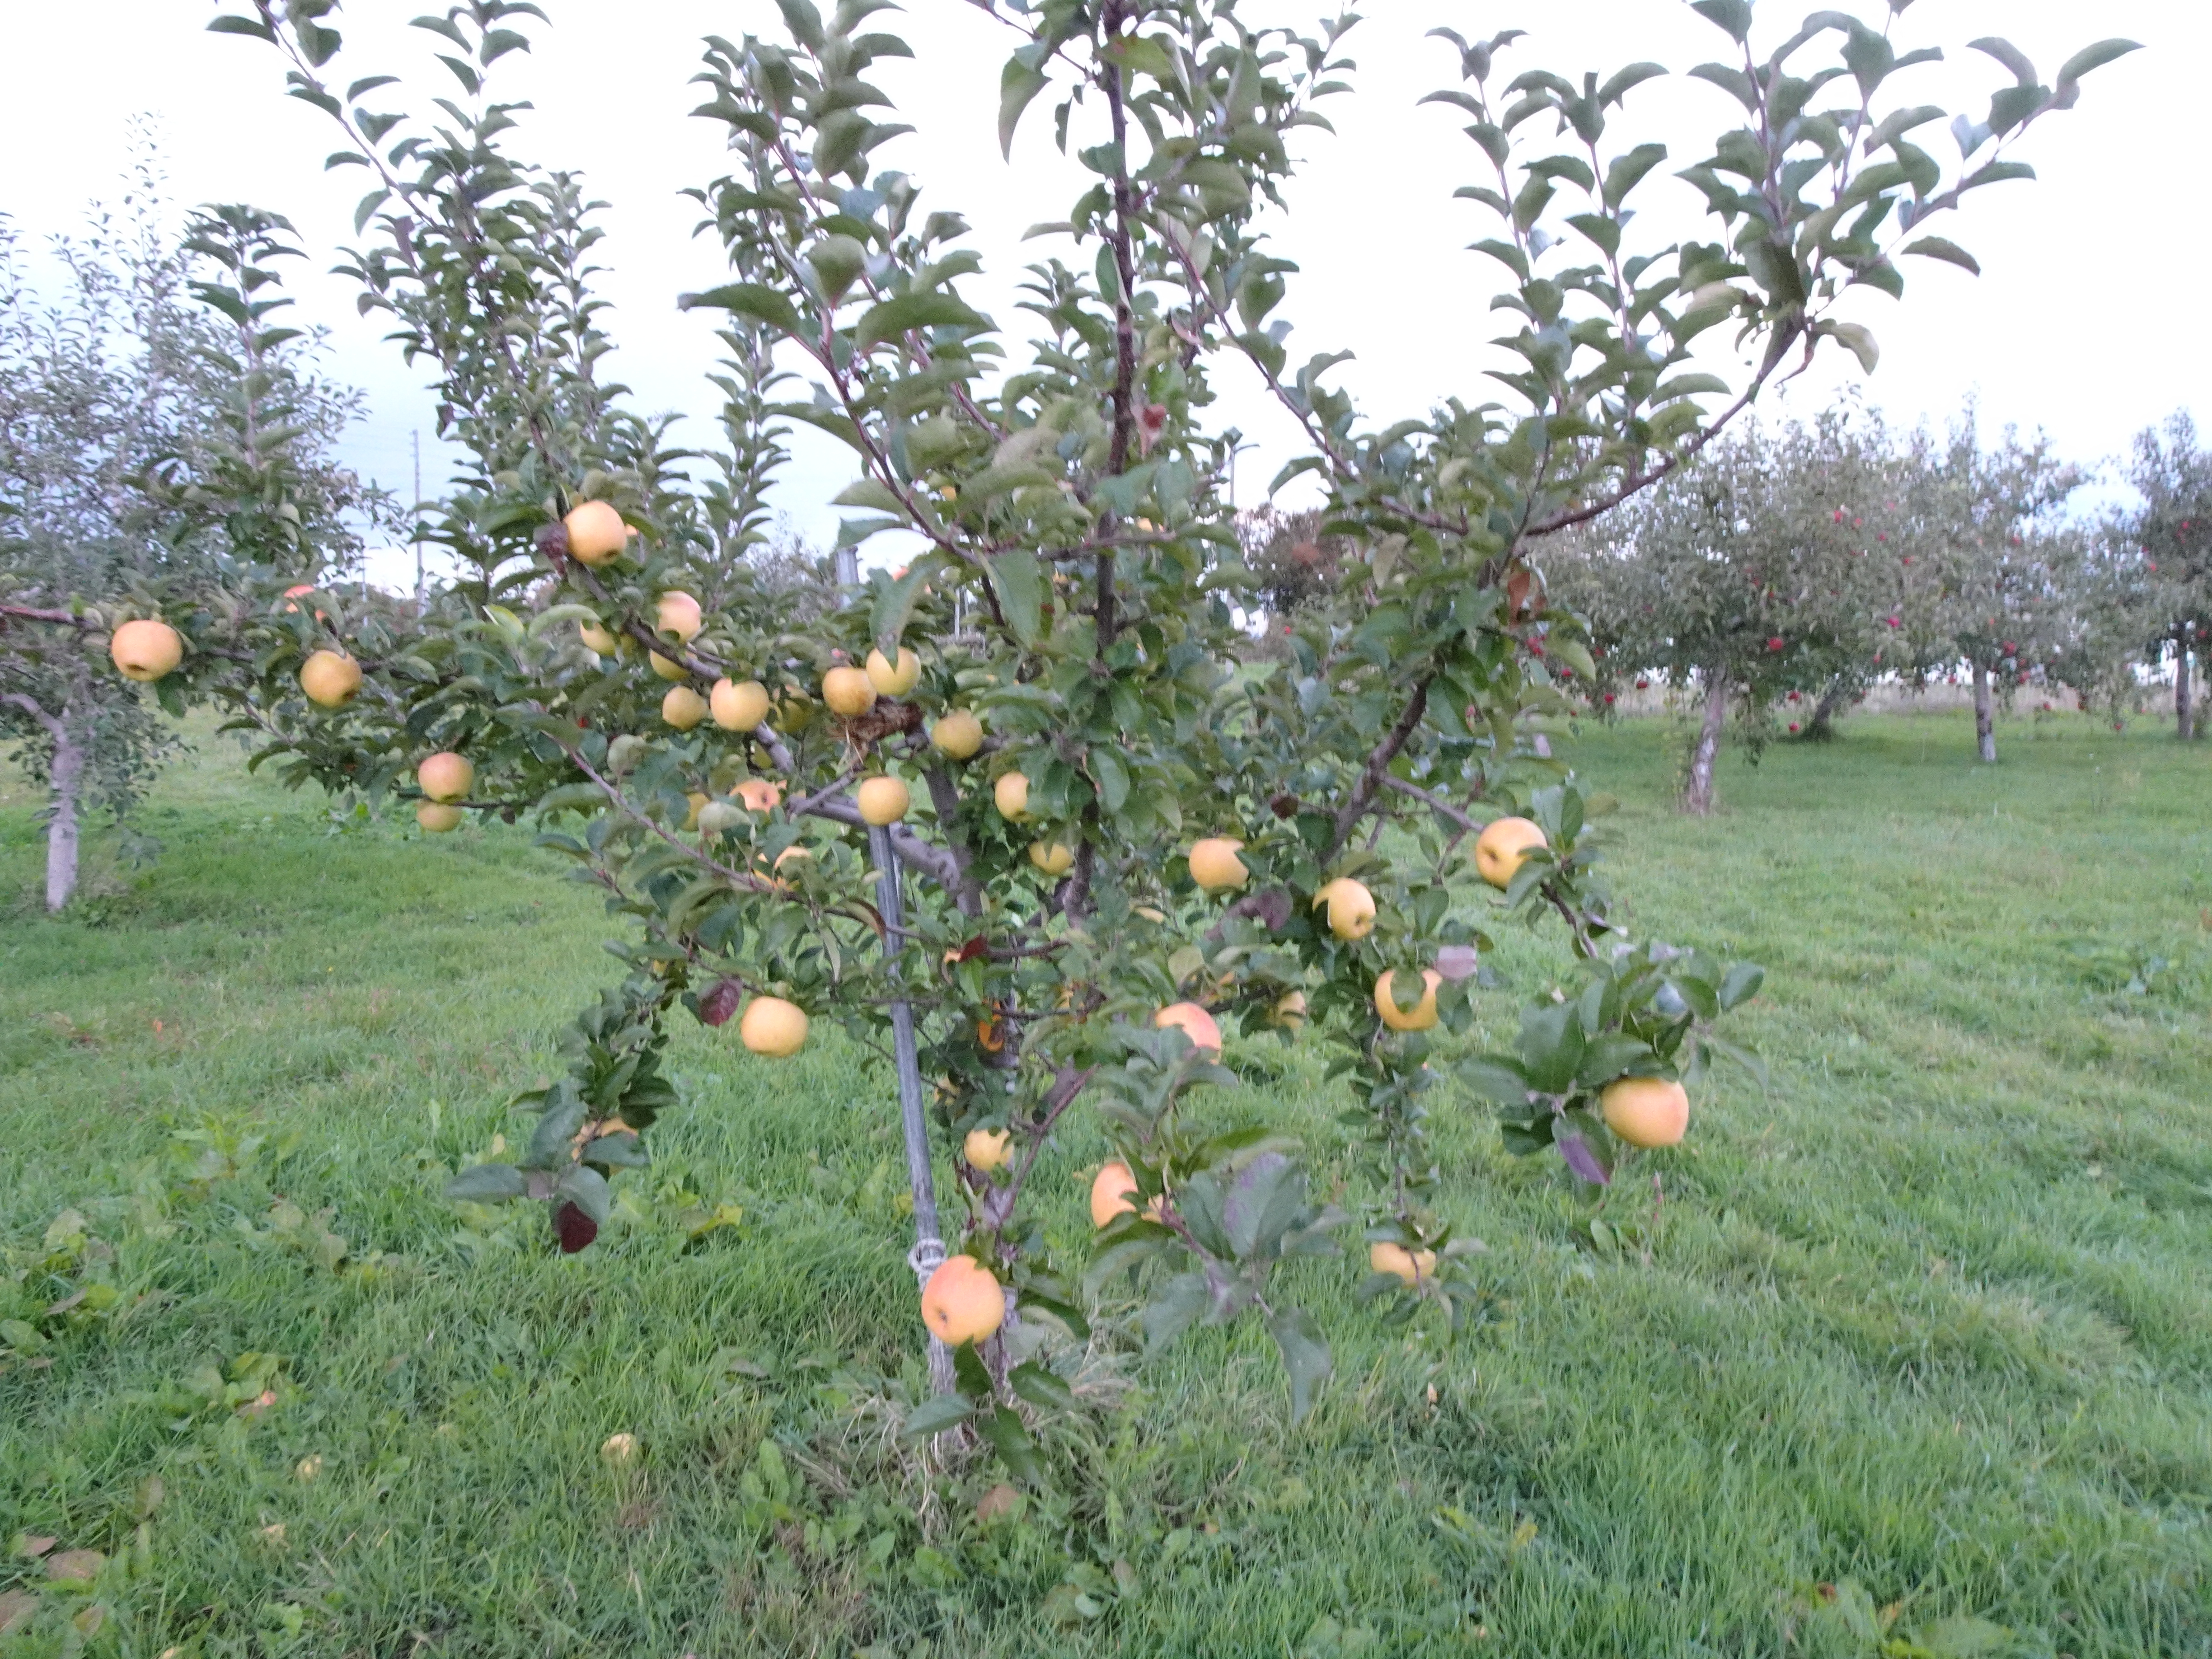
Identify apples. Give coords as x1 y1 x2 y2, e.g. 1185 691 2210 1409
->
753 844 819 894
557 499 628 568
936 472 969 504
1132 516 1166 551
299 644 365 712
1370 1234 1437 1295
1188 829 1254 898
616 521 664 579
661 686 709 733
1180 951 1236 1009
977 673 1022 709
890 568 932 609
811 644 849 678
1312 876 1377 946
712 674 770 735
1141 1000 1225 1077
1011 483 1042 515
866 640 921 699
578 597 641 660
277 582 335 633
725 778 782 827
1090 1159 1177 1238
571 1114 640 1176
941 947 982 989
919 1254 1008 1350
1040 565 1068 600
1027 826 1077 876
770 774 807 809
1473 814 1549 892
856 775 911 827
417 750 477 805
994 767 1047 826
642 588 703 645
1117 905 1179 964
1059 983 1091 1028
930 703 984 760
820 665 879 719
1374 962 1447 1033
1278 623 1296 638
1600 1066 1691 1151
740 994 811 1062
110 619 185 683
672 794 713 832
964 1117 1017 1173
768 683 812 736
1254 984 1308 1034
650 637 700 683
417 796 463 834
934 1075 977 1115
